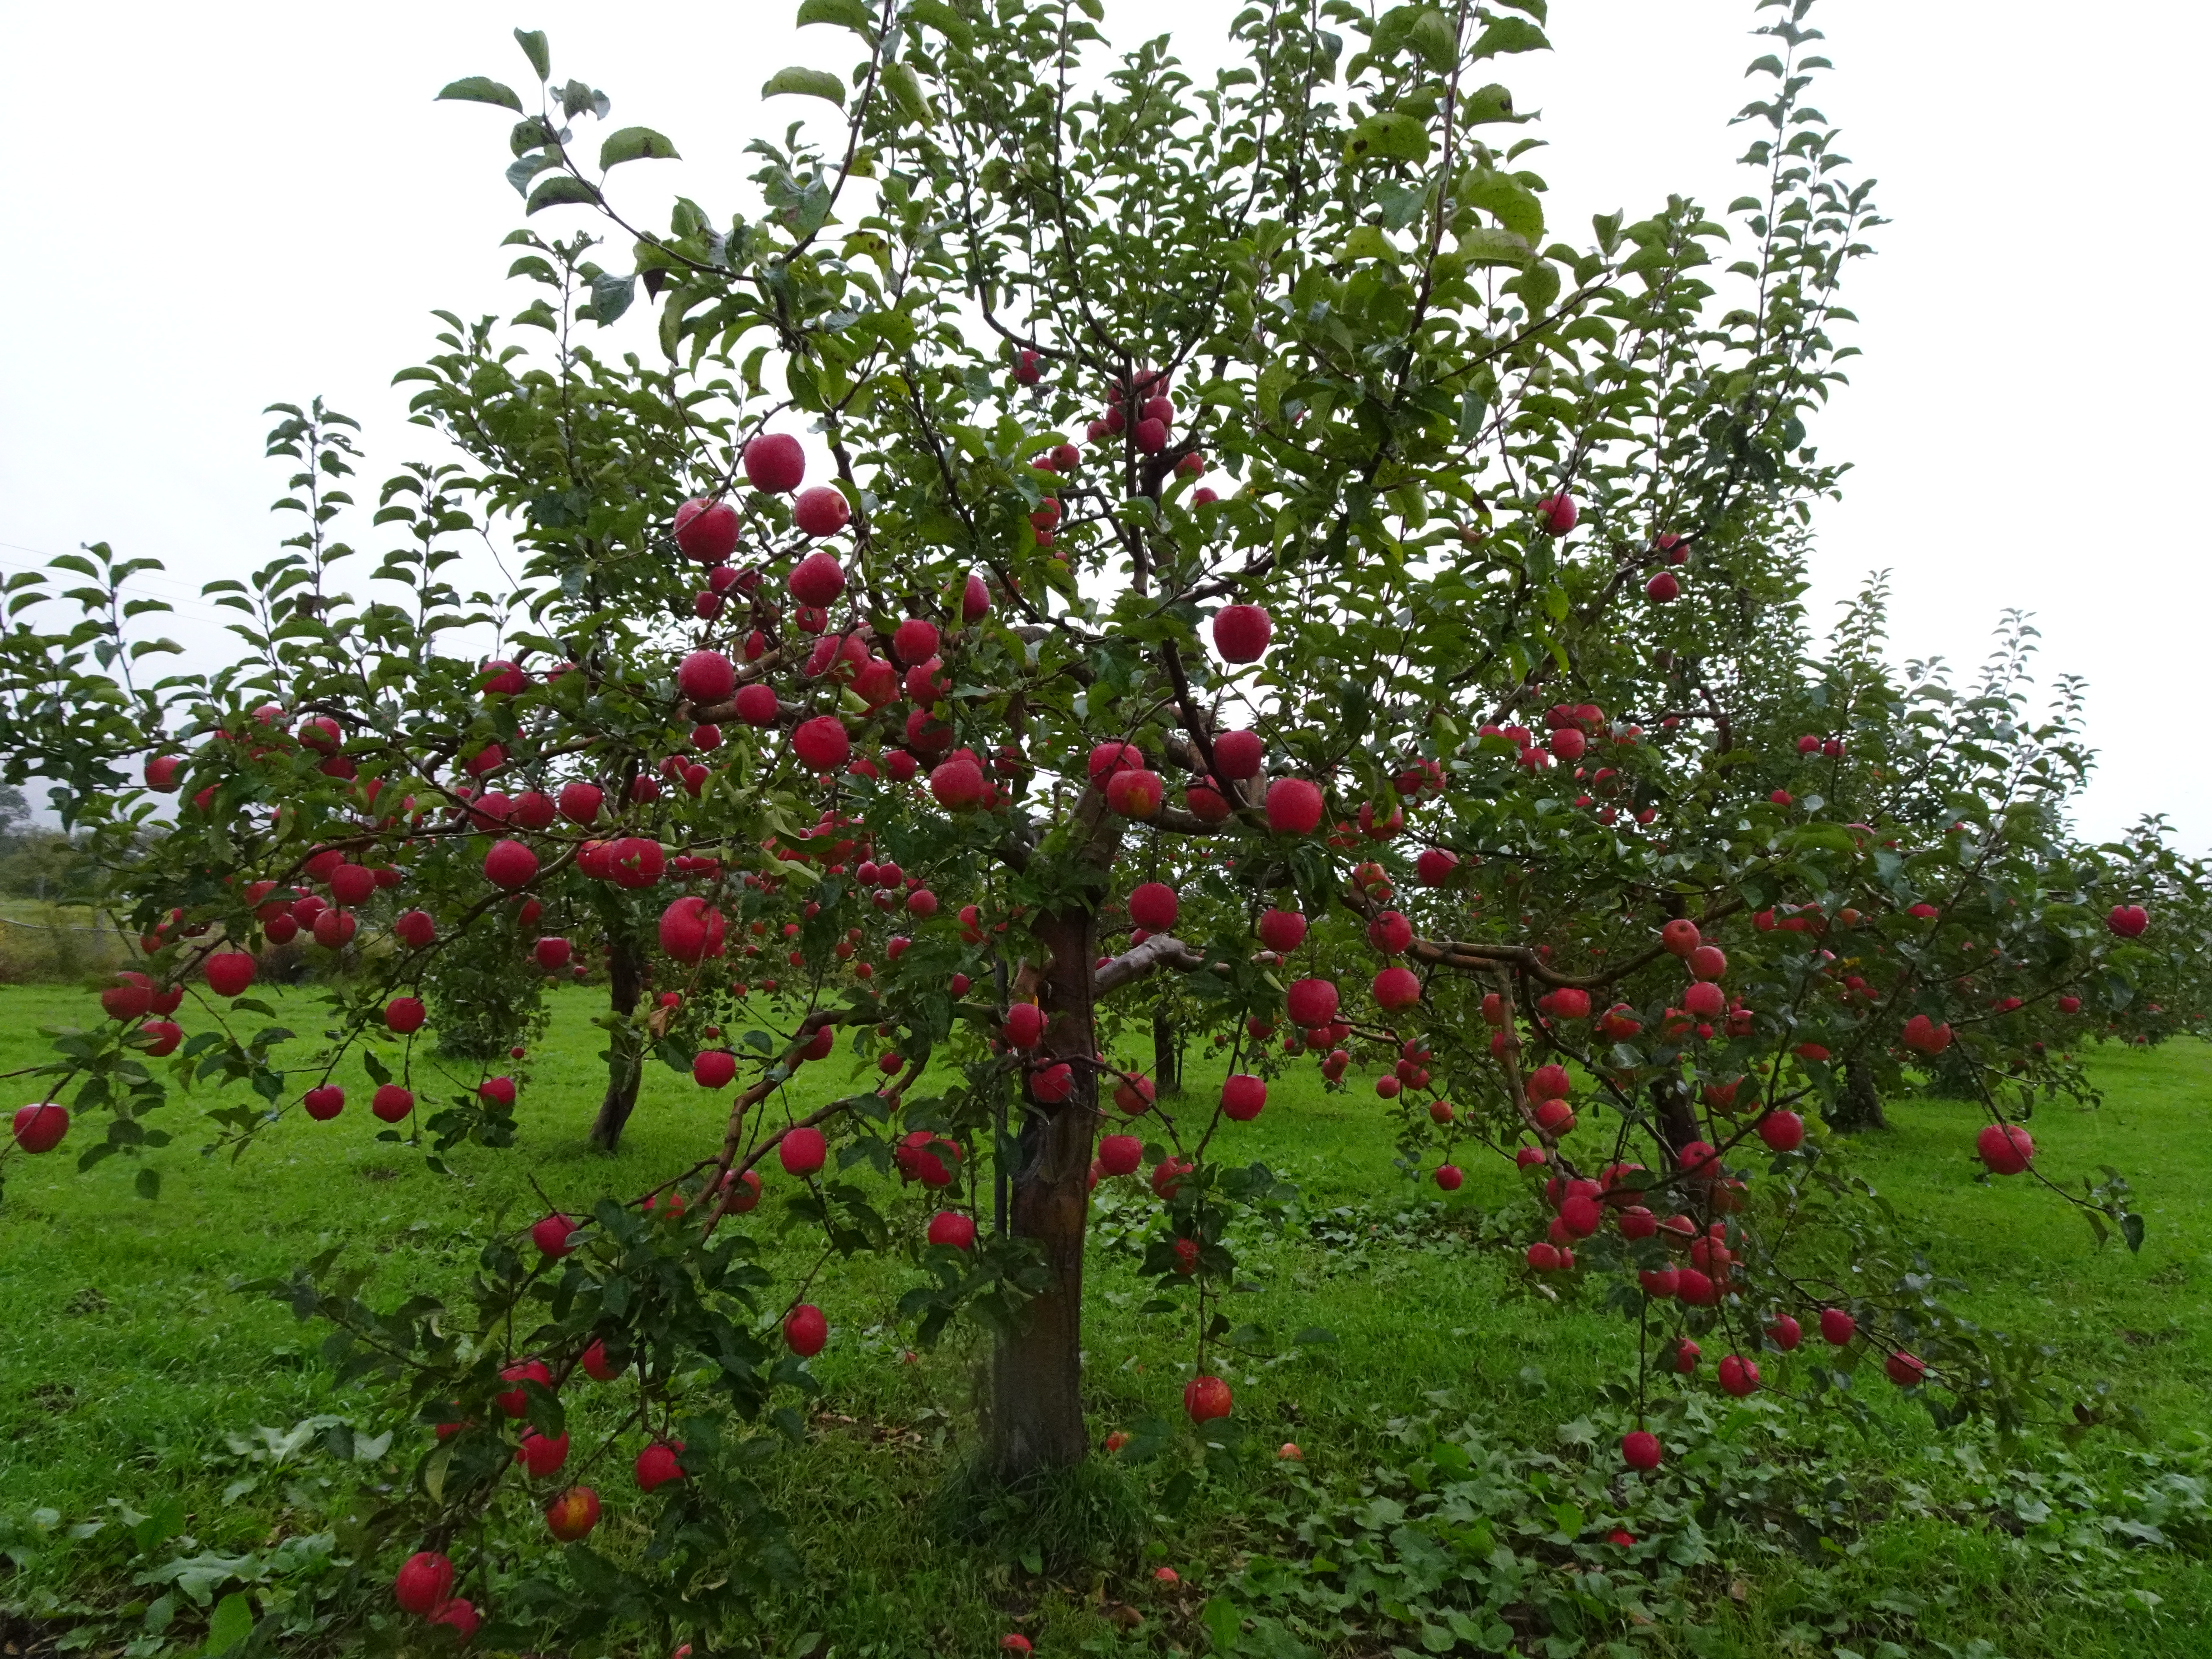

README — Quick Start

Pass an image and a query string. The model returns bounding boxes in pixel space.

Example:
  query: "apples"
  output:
[873,1086,903,1114]
[1895,964,1923,986]
[940,970,971,1004]
[1661,919,1700,959]
[1258,904,1309,953]
[242,879,292,923]
[762,976,781,997]
[1872,942,1888,955]
[761,874,779,899]
[876,1051,904,1077]
[138,1019,184,1059]
[1185,773,1231,827]
[1869,769,1885,784]
[1763,1311,1803,1355]
[302,843,345,882]
[1027,496,1062,532]
[1651,532,1692,567]
[328,864,375,907]
[1331,1046,1353,1068]
[1359,794,1404,839]
[1031,455,1056,478]
[1589,942,1618,972]
[1571,703,1603,736]
[1534,1097,1576,1139]
[682,765,715,801]
[667,498,745,566]
[1560,1194,1602,1238]
[1621,1428,1662,1471]
[731,629,766,667]
[443,788,486,824]
[1264,777,1322,840]
[987,903,1013,934]
[514,1420,572,1480]
[854,835,876,864]
[1083,1168,1100,1201]
[1673,1049,1686,1065]
[678,650,738,709]
[745,874,760,890]
[1519,681,1542,705]
[1557,1242,1580,1272]
[1502,870,1523,887]
[315,907,358,953]
[688,723,724,752]
[978,782,1014,816]
[1907,904,1940,933]
[1100,1132,1143,1181]
[1725,1009,1758,1040]
[422,1595,479,1651]
[712,844,732,864]
[1102,898,1123,921]
[1610,724,1643,751]
[1842,822,1877,851]
[786,550,847,607]
[1616,1203,1657,1244]
[994,573,1023,606]
[571,962,589,982]
[1011,904,1031,920]
[1326,818,1359,855]
[1698,690,1712,700]
[478,658,527,704]
[741,431,806,495]
[204,864,243,901]
[873,888,896,918]
[2031,1039,2048,1054]
[639,976,659,993]
[691,1050,737,1090]
[390,907,437,953]
[1166,1231,1211,1278]
[929,761,985,814]
[490,1354,552,1421]
[1681,1267,1724,1309]
[582,1333,631,1384]
[1645,569,1681,605]
[1662,714,1681,734]
[1132,365,1160,401]
[206,950,259,999]
[737,685,780,729]
[142,754,184,796]
[1901,986,1919,1002]
[1749,897,1806,945]
[1757,1109,1805,1153]
[740,565,769,595]
[1599,1001,1643,1045]
[1545,704,1574,734]
[1564,1175,1602,1209]
[139,922,180,959]
[458,736,511,779]
[1174,448,1205,486]
[1309,765,1338,789]
[1545,1173,1576,1214]
[172,901,212,935]
[347,775,390,817]
[1129,925,1158,952]
[693,588,724,623]
[1352,860,1398,904]
[1770,789,1792,813]
[1489,1029,1520,1062]
[1030,524,1054,553]
[1212,603,1277,666]
[381,794,425,843]
[1520,910,1537,928]
[748,914,766,938]
[482,838,543,896]
[1662,1336,1701,1377]
[576,838,617,883]
[1658,1007,1694,1043]
[596,835,668,900]
[466,789,519,839]
[794,1017,835,1063]
[809,823,854,867]
[370,1081,415,1124]
[139,975,184,1018]
[1690,1235,1733,1273]
[1090,1107,1106,1124]
[1035,734,1055,751]
[1320,1059,1344,1081]
[1105,402,1133,435]
[212,714,248,753]
[1091,1154,1115,1182]
[1434,1164,1465,1192]
[828,863,851,883]
[805,651,830,685]
[1835,906,1868,936]
[887,934,916,966]
[544,1482,601,1547]
[891,619,941,667]
[1663,1212,1699,1251]
[1470,893,1496,922]
[1686,943,1728,982]
[1282,1032,1305,1058]
[1464,854,1482,873]
[948,746,978,769]
[656,894,728,967]
[1683,980,1724,1025]
[1088,1047,1104,1069]
[385,995,427,1037]
[1884,1350,1928,1389]
[2056,995,2079,1019]
[1959,937,1977,956]
[1957,972,1977,995]
[1050,442,1080,473]
[1822,738,1846,758]
[435,1398,494,1445]
[732,985,747,998]
[496,723,528,749]
[1756,1060,1772,1076]
[822,809,852,833]
[1528,863,1547,880]
[1945,822,1966,838]
[1534,491,1577,537]
[1887,1038,1904,1058]
[1718,1353,1762,1398]
[916,1136,965,1192]
[1408,758,1448,793]
[297,891,336,934]
[911,789,932,809]
[1130,417,1167,454]
[1168,847,1183,862]
[1191,487,1223,515]
[530,1212,583,1259]
[1995,991,2023,1020]
[1304,1026,1339,1052]
[1087,420,1117,449]
[783,922,799,939]
[394,1550,453,1619]
[625,774,662,806]
[1607,1064,1641,1093]
[640,1190,688,1236]
[602,942,618,957]
[792,484,851,539]
[1806,947,1838,980]
[1286,977,1340,1031]
[658,754,692,787]
[1370,966,1422,1015]
[1374,1075,1400,1103]
[709,566,745,596]
[1516,1147,1547,1175]
[1801,897,1828,932]
[1518,747,1550,778]
[789,951,806,971]
[1715,1221,1751,1249]
[1565,921,1581,933]
[1112,1071,1159,1117]
[1550,726,1586,761]
[1530,1063,1572,1100]
[903,706,959,752]
[957,904,992,945]
[687,849,722,881]
[1537,991,1562,1018]
[1247,1013,1277,1041]
[1219,1072,1270,1123]
[1213,1033,1229,1049]
[1592,764,1622,799]
[1009,350,1043,387]
[548,660,591,702]
[11,1102,71,1157]
[1223,855,1238,871]
[893,1127,940,1184]
[1286,402,1304,422]
[1028,1057,1076,1106]
[781,1304,828,1358]
[1546,1216,1581,1246]
[1183,1374,1233,1428]
[303,1082,349,1124]
[296,716,341,755]
[1679,1139,1721,1185]
[251,742,287,784]
[908,894,938,922]
[1106,769,1164,821]
[1142,396,1176,427]
[846,926,866,943]
[1087,741,1144,794]
[779,1126,828,1179]
[641,958,661,975]
[533,935,573,971]
[262,911,303,948]
[1790,1036,1831,1068]
[1101,378,1132,406]
[699,760,726,780]
[864,990,887,1006]
[1197,848,1213,864]
[1475,723,1506,753]
[1262,949,1285,973]
[634,1438,693,1495]
[1479,993,1518,1029]
[1631,804,1656,825]
[1402,1067,1431,1094]
[1428,1100,1453,1125]
[764,824,809,872]
[850,757,882,792]
[1552,982,1592,1026]
[1525,1240,1561,1279]
[101,971,153,1023]
[878,861,905,890]
[249,702,291,743]
[854,620,883,648]
[791,719,852,776]
[995,1002,1049,1054]
[1794,732,1822,761]
[1573,762,1598,788]
[835,938,853,959]
[814,634,871,684]
[1572,793,1599,814]
[1900,1010,1951,1060]
[1845,974,1864,993]
[1698,1022,1716,1041]
[1083,1010,1099,1029]
[718,1165,765,1217]
[1252,1047,1271,1064]
[741,944,760,961]
[704,1024,722,1041]
[1880,833,1900,856]
[877,1017,900,1039]
[1047,549,1080,581]
[989,1033,1016,1060]
[905,654,952,711]
[270,804,311,844]
[941,573,991,624]
[670,697,702,723]
[373,862,405,889]
[1149,1154,1197,1201]
[1702,1068,1744,1116]
[1977,1122,2036,1179]
[1110,850,1126,866]
[880,748,915,785]
[1213,729,1263,781]
[660,991,681,1012]
[2134,1032,2149,1048]
[2000,895,2021,915]
[1367,909,1413,956]
[927,1210,976,1261]
[1404,1036,1432,1066]
[1096,953,1117,975]
[1818,1304,1858,1348]
[1601,1161,1649,1208]
[1989,944,2003,961]
[1647,841,1668,855]
[604,955,621,972]
[2106,904,2148,939]
[1532,941,1556,964]
[1503,724,1532,753]
[315,742,359,785]
[992,742,1031,781]
[1416,849,1462,887]
[855,862,878,890]
[558,781,606,827]
[663,854,691,885]
[1596,809,1617,826]
[1130,881,1179,934]
[514,791,558,831]
[801,898,820,923]
[1625,908,1642,921]
[1393,1056,1413,1077]
[508,1043,525,1060]
[1706,1176,1750,1217]
[853,962,875,982]
[1392,769,1429,810]
[796,602,831,635]
[476,1075,516,1117]
[1322,1013,1354,1042]
[1637,1254,1680,1301]
[2010,958,2025,975]
[850,659,897,706]
[745,599,781,635]
[2010,1057,2031,1080]
[190,783,239,825]
[2148,1001,2162,1017]
[814,775,835,793]
[1863,987,1881,1000]
[510,898,544,931]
